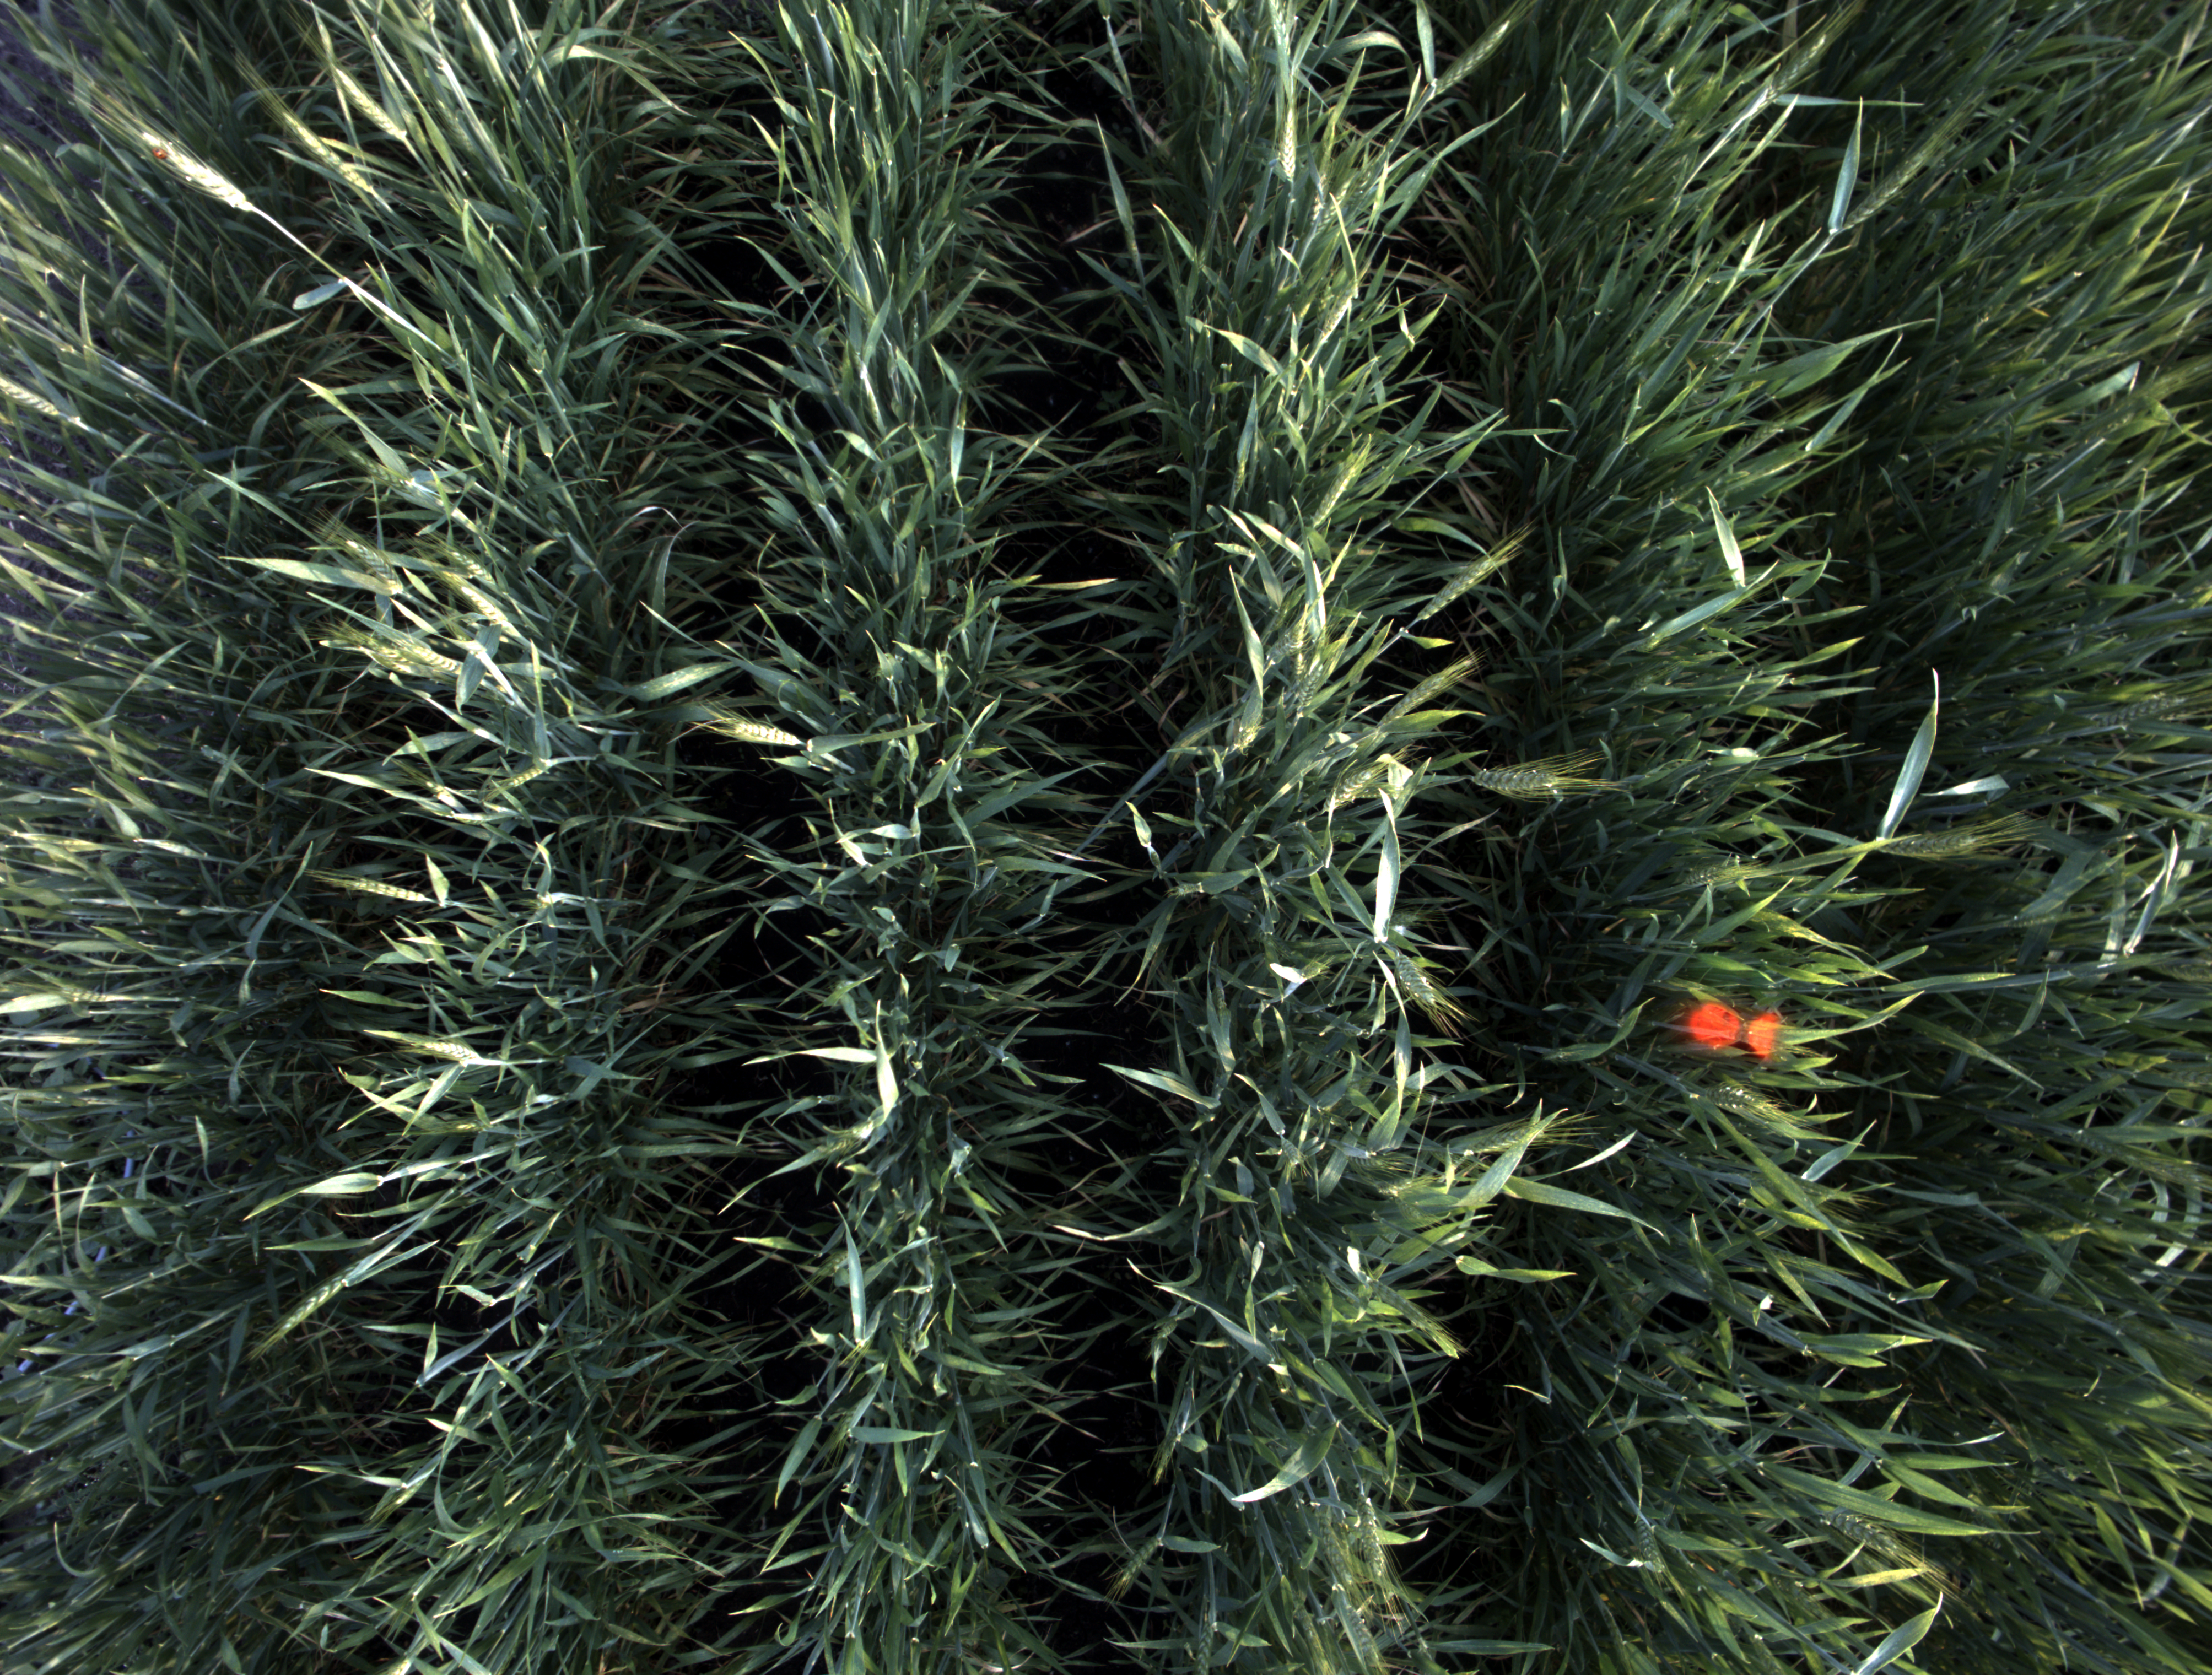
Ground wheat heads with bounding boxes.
[334,69,407,149]
[510,766,551,787]
[1192,1607,1220,1673]
[2155,954,2212,981]
[2165,1058,2212,1086]
[395,638,464,675]
[1126,1536,1160,1579]
[457,556,500,588]
[2075,1127,2155,1175]
[1886,826,1975,864]
[726,713,806,755]
[345,876,429,908]
[1418,554,1496,624]
[2078,697,2194,729]
[279,112,354,192]
[1313,460,1365,521]
[1382,672,1468,727]
[1838,147,1925,232]
[1640,474,1708,508]
[1635,16,1680,55]
[2076,384,2164,437]
[0,372,61,424]
[1477,764,1560,798]
[277,1273,352,1331]
[1329,183,1350,232]
[1311,172,1331,225]
[404,1036,480,1066]
[1740,417,1792,453]
[1685,865,1742,885]
[1336,1600,1381,1673]
[1382,951,1438,1017]
[357,455,405,490]
[1441,21,1518,87]
[1834,1511,1902,1564]
[1301,599,1324,661]
[133,120,252,209]
[1274,113,1299,190]
[1313,1504,1361,1600]
[1267,1,1295,51]
[1359,1513,1390,1586]
[1322,272,1356,337]
[1322,768,1395,814]
[1697,1090,1763,1113]
[366,643,436,677]
[1466,1127,1530,1150]
[340,540,402,588]
[1361,1273,1423,1324]
[63,986,106,1004]
[1635,1516,1662,1564]
[1769,26,1836,103]
[452,581,523,640]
